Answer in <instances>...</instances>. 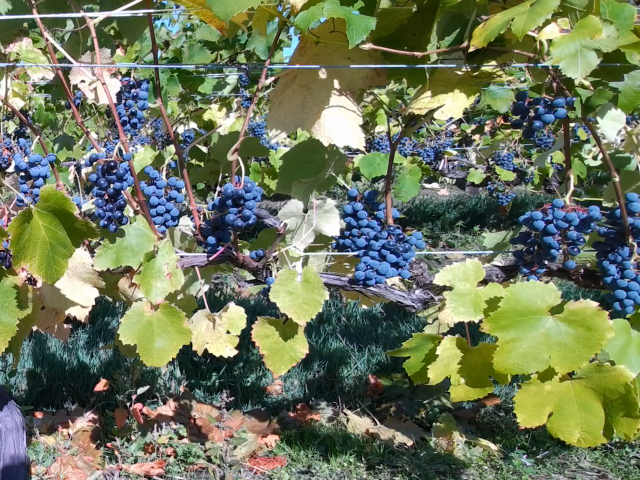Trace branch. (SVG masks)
<instances>
[{"instance_id": "1", "label": "branch", "mask_w": 640, "mask_h": 480, "mask_svg": "<svg viewBox=\"0 0 640 480\" xmlns=\"http://www.w3.org/2000/svg\"><path fill=\"white\" fill-rule=\"evenodd\" d=\"M154 87H155L156 100H157V105L159 107V111L161 112V114L163 116L165 127L168 130V134L174 141V149H175V152H176V157L179 158V161H180V166H181V171H182V174H183L184 184H185V187L187 189L188 195L190 197L191 205H192V216H193V219H194V225L196 226L197 229H200L201 228V223L199 222V216L197 214L196 198H195L194 192H193L192 187H191L190 182H189V177H188V172H187V169H186L184 155L181 154V149H180V146H179V139L175 135V133L173 131V128L171 127L168 114H167V112L165 110V107L163 105V102H162V98H161L162 97V94H161V78L159 77V69H154Z\"/></svg>"}, {"instance_id": "2", "label": "branch", "mask_w": 640, "mask_h": 480, "mask_svg": "<svg viewBox=\"0 0 640 480\" xmlns=\"http://www.w3.org/2000/svg\"><path fill=\"white\" fill-rule=\"evenodd\" d=\"M265 11L269 12L271 15L278 17L282 22L279 25L278 29L276 30V35L271 43V47L269 50V53L267 54L265 60H264V65H269V62L271 60V58L273 57L274 53H275V49L276 46L280 40V36L281 33L284 29V27L288 24L291 27L297 29L300 33H302L304 36H306L309 40H311L312 42L316 43V44H322V45H336V46H340V47H347L348 43L347 42H342V41H338V40H325V39H318L317 37H314L313 35H311L308 31H306L302 26H300L299 24H297L296 22H293L292 20H290L291 18V14L290 13H286L285 16L283 14H281L280 12L274 10L273 8H263Z\"/></svg>"}, {"instance_id": "3", "label": "branch", "mask_w": 640, "mask_h": 480, "mask_svg": "<svg viewBox=\"0 0 640 480\" xmlns=\"http://www.w3.org/2000/svg\"><path fill=\"white\" fill-rule=\"evenodd\" d=\"M267 73H268V70H262V72H261V75H260V77L258 79V82H257L256 92L252 96L249 109H248V111H247V113H246V115H245V117L243 119L242 127H241V129H240V131L238 133L237 138H236L235 151H234L233 156H232V163H231V167H230V184L231 185L235 184V169H236V166H237V159H238V156L240 154L241 140L243 138V135L246 132L248 121H249V119H250V117H251V115H252V113L254 111L256 101H257L258 97L261 94L262 84H263V81H264Z\"/></svg>"}, {"instance_id": "4", "label": "branch", "mask_w": 640, "mask_h": 480, "mask_svg": "<svg viewBox=\"0 0 640 480\" xmlns=\"http://www.w3.org/2000/svg\"><path fill=\"white\" fill-rule=\"evenodd\" d=\"M128 164L130 166L131 175L133 177V182L135 184L136 191H137V196L135 197V200L138 201L139 203H141L142 208L134 201V199L132 198V196L130 195V193L128 191H125L124 195L127 198V200L129 201V203L132 205L133 209L137 213H139L142 217L146 218L150 229L156 235V237L158 239H161L162 238V234L155 227V225L153 223V220H152V218L150 216V213L148 211L147 200L143 196L141 184L139 182L138 175L136 173L135 164H134V162L132 160H129Z\"/></svg>"}, {"instance_id": "5", "label": "branch", "mask_w": 640, "mask_h": 480, "mask_svg": "<svg viewBox=\"0 0 640 480\" xmlns=\"http://www.w3.org/2000/svg\"><path fill=\"white\" fill-rule=\"evenodd\" d=\"M359 47L360 48H368V49L379 50V51L392 53V54H396V55H400V56H406V57H430V56H434V55L441 54V53H444V52L467 49V48L470 47V44L469 43H464V44H460V45L442 47V48L431 50V51H428V52H408V51H402V50H398V49H395V48H389V47H386V46L370 44V43H360Z\"/></svg>"}, {"instance_id": "6", "label": "branch", "mask_w": 640, "mask_h": 480, "mask_svg": "<svg viewBox=\"0 0 640 480\" xmlns=\"http://www.w3.org/2000/svg\"><path fill=\"white\" fill-rule=\"evenodd\" d=\"M55 72L57 73V75H58V77L60 79V82H61V84H62V86H63V88L65 90V93H66V96H67V99H68V102H69L70 109H71V111H72V113H73V115L75 117L77 125L80 127V129L90 139V141L93 144L94 149L97 152H101L102 148L99 147L97 140L95 139L93 134L90 132V130L84 125V123L82 122V119L80 118V115H79V113L77 111V108H76V106L74 104V100H73V96H72L71 90L69 88V85L67 84V81H66V79L64 77V74H63L62 70L61 69H55Z\"/></svg>"}, {"instance_id": "7", "label": "branch", "mask_w": 640, "mask_h": 480, "mask_svg": "<svg viewBox=\"0 0 640 480\" xmlns=\"http://www.w3.org/2000/svg\"><path fill=\"white\" fill-rule=\"evenodd\" d=\"M404 135H405V130L401 129L400 132L395 137L393 145L391 147L389 162H388L387 171H386V200H387L386 218H387V221H388L389 224L393 223V218H392V215H391V210H392L391 174H392L394 159H395V155H396V150H397L398 144L400 142V139Z\"/></svg>"}, {"instance_id": "8", "label": "branch", "mask_w": 640, "mask_h": 480, "mask_svg": "<svg viewBox=\"0 0 640 480\" xmlns=\"http://www.w3.org/2000/svg\"><path fill=\"white\" fill-rule=\"evenodd\" d=\"M581 120L583 121L584 125L586 126V128L588 129V131L593 135V137L596 140V143L598 145L599 148V152L602 156V158L604 159V161L607 163L609 169L612 172V176H613V181H614V185L617 189V196L619 199L623 198V194H622V187L619 183V179H618V174H617V170L613 165L612 160L607 156L604 146H603V142L601 141V138L599 136V134L596 132V130L592 127V125L589 123L588 119L585 116L581 117Z\"/></svg>"}, {"instance_id": "9", "label": "branch", "mask_w": 640, "mask_h": 480, "mask_svg": "<svg viewBox=\"0 0 640 480\" xmlns=\"http://www.w3.org/2000/svg\"><path fill=\"white\" fill-rule=\"evenodd\" d=\"M97 78H98V82L101 85V87L103 88L105 96L107 97V100L109 102L110 111H111V114H112L113 118L116 121V126H117V129H118L119 133H120V137H121V140H122V143H123V146H124V150L126 152H129L130 151L129 143L127 141V137H126L125 131L123 129L120 116L118 115V113L116 111V108H115V105H114V101H113V97H112V95H111V93L109 91V88H108L106 82L103 79L102 69H97Z\"/></svg>"}, {"instance_id": "10", "label": "branch", "mask_w": 640, "mask_h": 480, "mask_svg": "<svg viewBox=\"0 0 640 480\" xmlns=\"http://www.w3.org/2000/svg\"><path fill=\"white\" fill-rule=\"evenodd\" d=\"M564 127V135H563V143L565 150V191L569 192L571 189V181L570 175L572 172V158H571V149H570V124L567 120L563 121Z\"/></svg>"}, {"instance_id": "11", "label": "branch", "mask_w": 640, "mask_h": 480, "mask_svg": "<svg viewBox=\"0 0 640 480\" xmlns=\"http://www.w3.org/2000/svg\"><path fill=\"white\" fill-rule=\"evenodd\" d=\"M0 101L4 105H6L8 108H10L11 111L15 114V116L18 119H20L27 127H29L30 130L33 131V133L38 137V141H39V144H40V147H41L43 153L45 155H48L49 154V150H48V148H47V146H46V144L44 142L42 133L27 118H25L10 101H8L2 95H0Z\"/></svg>"}, {"instance_id": "12", "label": "branch", "mask_w": 640, "mask_h": 480, "mask_svg": "<svg viewBox=\"0 0 640 480\" xmlns=\"http://www.w3.org/2000/svg\"><path fill=\"white\" fill-rule=\"evenodd\" d=\"M489 51H506V52H513V53H518L521 55H525L526 57H529L537 62L543 63L544 59L541 58L540 56L531 53L527 50H523L520 48H515V47H508V46H489L488 47Z\"/></svg>"}, {"instance_id": "13", "label": "branch", "mask_w": 640, "mask_h": 480, "mask_svg": "<svg viewBox=\"0 0 640 480\" xmlns=\"http://www.w3.org/2000/svg\"><path fill=\"white\" fill-rule=\"evenodd\" d=\"M83 21L86 22L89 26V31L90 34L92 36V42H93V47H94V54H95V58H96V63L100 64L101 63V56H100V51H99V45H98V40H97V33L94 29V24L93 21L89 18V17H84Z\"/></svg>"}, {"instance_id": "14", "label": "branch", "mask_w": 640, "mask_h": 480, "mask_svg": "<svg viewBox=\"0 0 640 480\" xmlns=\"http://www.w3.org/2000/svg\"><path fill=\"white\" fill-rule=\"evenodd\" d=\"M35 23L40 28V32H41V34H42V36L44 38V41H45V44H46V48L48 50V53L50 55V58H51L52 62L54 64H57L58 63V59H57V57H56V55H55V53L53 51V47L51 45V41H50L48 33H47L46 29H45L44 24L41 22V20H35Z\"/></svg>"}, {"instance_id": "15", "label": "branch", "mask_w": 640, "mask_h": 480, "mask_svg": "<svg viewBox=\"0 0 640 480\" xmlns=\"http://www.w3.org/2000/svg\"><path fill=\"white\" fill-rule=\"evenodd\" d=\"M147 26L149 29V35H150V40H151V44H152V55H153V59H154V63L158 64L159 63V56L157 53V41H156V37H155V32H154V27L152 24V18L150 17V15L147 16Z\"/></svg>"}, {"instance_id": "16", "label": "branch", "mask_w": 640, "mask_h": 480, "mask_svg": "<svg viewBox=\"0 0 640 480\" xmlns=\"http://www.w3.org/2000/svg\"><path fill=\"white\" fill-rule=\"evenodd\" d=\"M50 167H51V170H52V172H53V174H54V176H55L56 181H57V182H58V184H59V189H60V191H61L62 193H66V192H67V189H66V187H65V184H64V182H63L62 178L60 177L59 171L57 170L55 163H54V162H51V163H50Z\"/></svg>"}, {"instance_id": "17", "label": "branch", "mask_w": 640, "mask_h": 480, "mask_svg": "<svg viewBox=\"0 0 640 480\" xmlns=\"http://www.w3.org/2000/svg\"><path fill=\"white\" fill-rule=\"evenodd\" d=\"M544 70L547 71V73L551 76L553 81L560 87L561 90H563L567 95L571 94L570 89L562 83V81L556 76V74L553 72L552 69H544Z\"/></svg>"}, {"instance_id": "18", "label": "branch", "mask_w": 640, "mask_h": 480, "mask_svg": "<svg viewBox=\"0 0 640 480\" xmlns=\"http://www.w3.org/2000/svg\"><path fill=\"white\" fill-rule=\"evenodd\" d=\"M231 234H232V244H233V249H234L235 254H240V255H242V254H241V251H240V249H239V247H238V242H237V232H236L235 230H232V231H231Z\"/></svg>"}]
</instances>
